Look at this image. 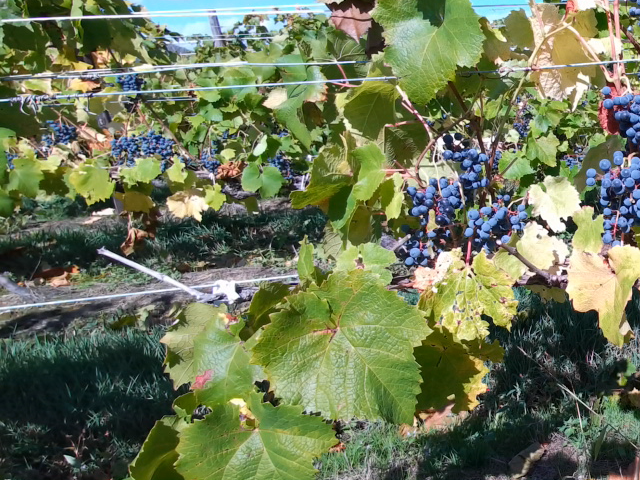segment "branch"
<instances>
[{
  "label": "branch",
  "instance_id": "branch-1",
  "mask_svg": "<svg viewBox=\"0 0 640 480\" xmlns=\"http://www.w3.org/2000/svg\"><path fill=\"white\" fill-rule=\"evenodd\" d=\"M448 86L450 87V89H451L452 93L454 94V96L456 97L457 101L460 103L461 109L464 111V113L462 114V116L460 118L455 120L449 126L445 127L438 135H436L430 141V143L427 145V147L421 152V154L418 156V158L416 159V161H415V172H416V176H417V180H418V184H419V189L420 190L424 189V182H423V178H422V174H421V170H420L421 161L428 154V152L432 149V147L435 145V143H437L446 133H448L449 131L454 129L456 126H458L460 123H462L467 117H468L469 122L472 125L473 130H474V134L476 136L477 143H478V146H479V152L480 153H484L485 152L483 140H482L481 134L479 132V127H478L473 115L469 114L468 107L466 106L465 100L461 97V95L457 91V88L455 87V85H454V83L452 81L448 82Z\"/></svg>",
  "mask_w": 640,
  "mask_h": 480
},
{
  "label": "branch",
  "instance_id": "branch-3",
  "mask_svg": "<svg viewBox=\"0 0 640 480\" xmlns=\"http://www.w3.org/2000/svg\"><path fill=\"white\" fill-rule=\"evenodd\" d=\"M618 7H619V0H614L613 29L615 32V42L617 44H620L621 40H620ZM604 8H605L606 25H607V31H608V42H609V48L611 51V60H616V49H615L614 40H613V29H612V23H611V12H610L609 0H604Z\"/></svg>",
  "mask_w": 640,
  "mask_h": 480
},
{
  "label": "branch",
  "instance_id": "branch-4",
  "mask_svg": "<svg viewBox=\"0 0 640 480\" xmlns=\"http://www.w3.org/2000/svg\"><path fill=\"white\" fill-rule=\"evenodd\" d=\"M574 27L573 23L564 25L562 27H559L553 31H550L548 33H546L541 40L537 43L536 47L534 48V51L530 54V58L527 60V65H532V62L535 60V57L537 56V54L539 53V50L541 49V47L544 45V43L552 36H555L559 33H562L566 30L572 29Z\"/></svg>",
  "mask_w": 640,
  "mask_h": 480
},
{
  "label": "branch",
  "instance_id": "branch-5",
  "mask_svg": "<svg viewBox=\"0 0 640 480\" xmlns=\"http://www.w3.org/2000/svg\"><path fill=\"white\" fill-rule=\"evenodd\" d=\"M488 193L490 194L492 201L496 200V193H495L494 189L492 187H490V186H487L485 188V190L483 191L482 195H481V198H480V201H479V206L480 207L484 206V203H485V200L487 198Z\"/></svg>",
  "mask_w": 640,
  "mask_h": 480
},
{
  "label": "branch",
  "instance_id": "branch-6",
  "mask_svg": "<svg viewBox=\"0 0 640 480\" xmlns=\"http://www.w3.org/2000/svg\"><path fill=\"white\" fill-rule=\"evenodd\" d=\"M448 228H449L450 234H451L452 245L454 247H457L458 246V242H457V238H456L455 228H454V226L452 224H449Z\"/></svg>",
  "mask_w": 640,
  "mask_h": 480
},
{
  "label": "branch",
  "instance_id": "branch-2",
  "mask_svg": "<svg viewBox=\"0 0 640 480\" xmlns=\"http://www.w3.org/2000/svg\"><path fill=\"white\" fill-rule=\"evenodd\" d=\"M527 74H528V71L526 70V71H522V73L519 75V78H518L517 84L515 86V89H514L512 95H511V97L509 99V102L507 103V107L504 110V113L502 115L500 124H499V126H498V128L496 130L495 135H494L492 144H491L490 149H489V155H488L487 163L484 164V168H485V171H486V177L487 178L491 177V168H492V163H493V157H494V152H495L496 146L498 144L499 137H500V135L502 133V130H503L504 126H505V123H506L507 117L509 115V112L512 109V105L514 104V101L516 100V97H517V95H518V93L520 91V88H521L522 84H523V80H524V78H525V76Z\"/></svg>",
  "mask_w": 640,
  "mask_h": 480
}]
</instances>
